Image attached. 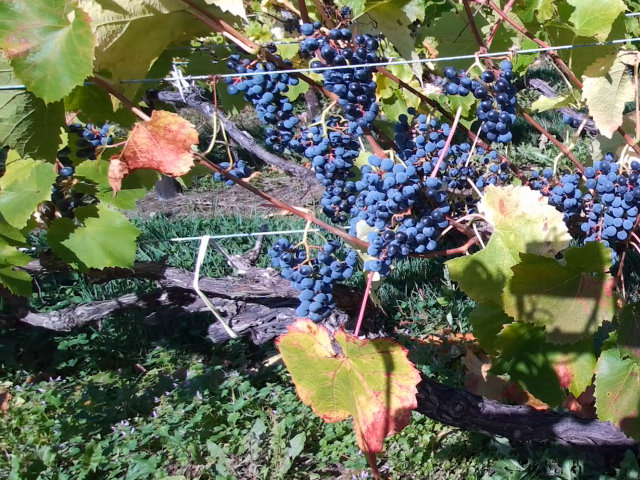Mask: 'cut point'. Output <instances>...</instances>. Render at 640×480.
<instances>
[{"label": "cut point", "mask_w": 640, "mask_h": 480, "mask_svg": "<svg viewBox=\"0 0 640 480\" xmlns=\"http://www.w3.org/2000/svg\"><path fill=\"white\" fill-rule=\"evenodd\" d=\"M303 229L305 230V233L302 234V242L306 243L307 242V231L309 230L316 238L318 239H323L324 235L321 233H317L316 229L311 225L310 222L305 221L304 225H303Z\"/></svg>", "instance_id": "cut-point-1"}, {"label": "cut point", "mask_w": 640, "mask_h": 480, "mask_svg": "<svg viewBox=\"0 0 640 480\" xmlns=\"http://www.w3.org/2000/svg\"><path fill=\"white\" fill-rule=\"evenodd\" d=\"M479 53H483V52H481V51L479 50V48H476V49L474 50V60H475V62H473V63L470 65V68H471V69H475L476 67H477V69H478V70H482V69H483V66H482V64H481V62H480V58L478 57V54H479Z\"/></svg>", "instance_id": "cut-point-2"}, {"label": "cut point", "mask_w": 640, "mask_h": 480, "mask_svg": "<svg viewBox=\"0 0 640 480\" xmlns=\"http://www.w3.org/2000/svg\"><path fill=\"white\" fill-rule=\"evenodd\" d=\"M337 102H338V101H337ZM337 102H333V101H331V102L329 103V105H328L327 107H325V108L321 111V118H322V119H325V118H326V114H327V115H331V114H332V111H331V110L334 108V106H335V104H336Z\"/></svg>", "instance_id": "cut-point-3"}, {"label": "cut point", "mask_w": 640, "mask_h": 480, "mask_svg": "<svg viewBox=\"0 0 640 480\" xmlns=\"http://www.w3.org/2000/svg\"><path fill=\"white\" fill-rule=\"evenodd\" d=\"M630 147H631V146H630L628 143L623 147V149H622V151L620 152V155H619V157H618V163H619V164H622V163H623L624 157H625V155H626L627 151L630 149Z\"/></svg>", "instance_id": "cut-point-4"}]
</instances>
